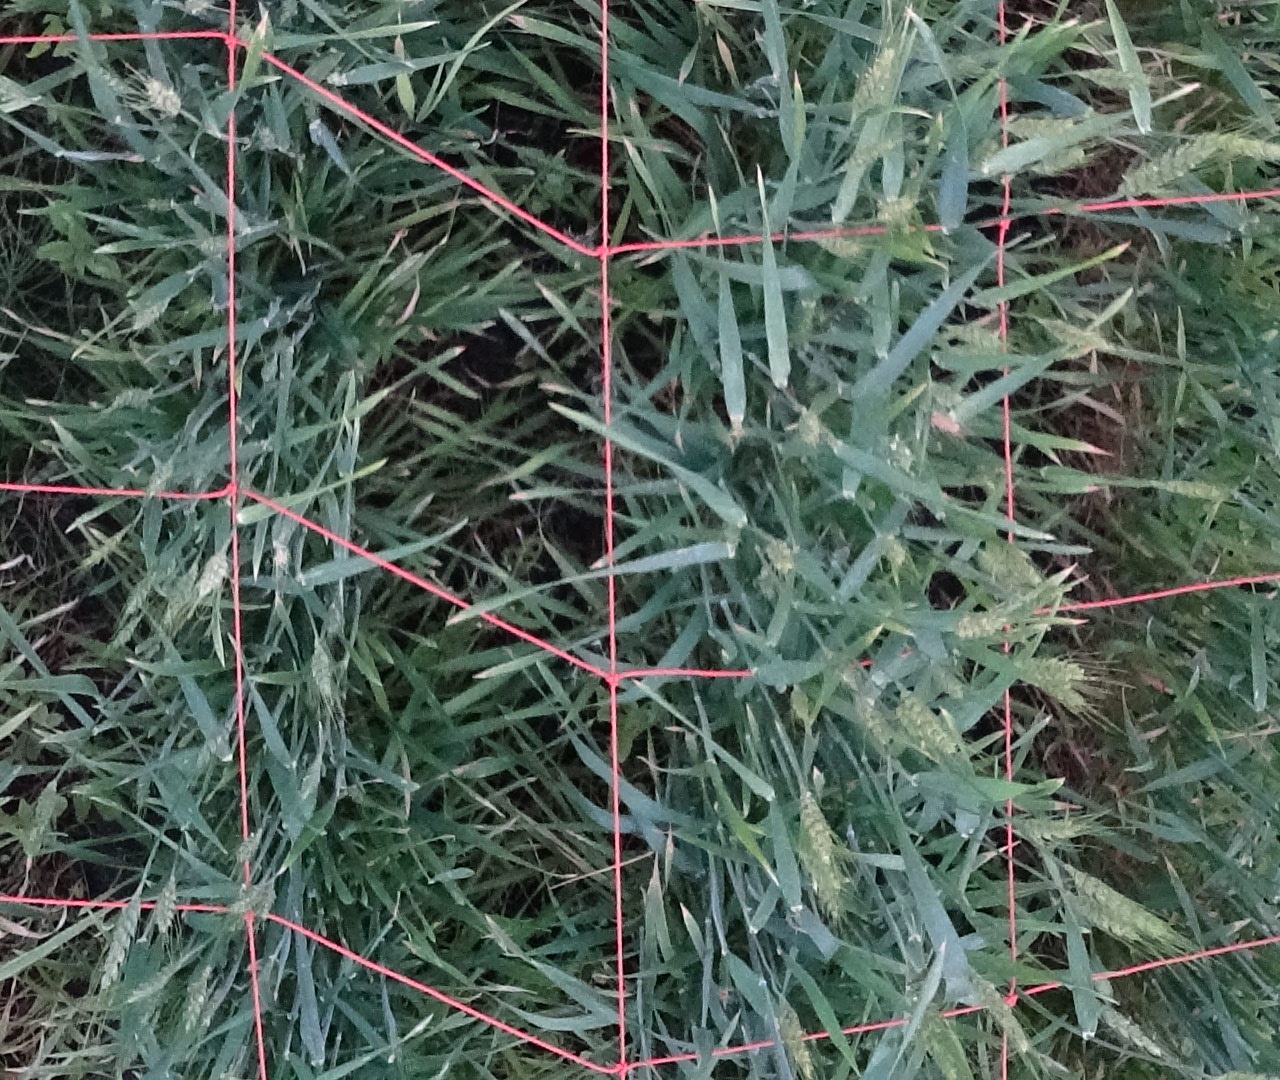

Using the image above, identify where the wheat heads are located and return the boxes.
[233,831,261,860]
[920,1026,961,1078]
[136,773,148,811]
[102,898,140,984]
[898,689,954,758]
[1062,891,1144,952]
[994,542,1041,585]
[143,458,178,491]
[108,621,136,655]
[839,136,901,169]
[853,50,896,102]
[805,844,840,922]
[943,321,1003,356]
[202,223,228,254]
[1047,686,1092,715]
[1015,655,1097,691]
[1083,63,1156,92]
[925,381,957,404]
[1196,130,1280,169]
[857,689,891,742]
[1157,476,1223,502]
[201,547,235,594]
[798,789,832,856]
[778,1007,813,1073]
[314,644,337,704]
[126,573,151,624]
[139,301,168,330]
[116,952,178,1016]
[91,531,131,562]
[159,879,183,927]
[1119,143,1212,195]
[159,564,197,623]
[183,965,211,1034]
[1030,146,1089,176]
[233,881,266,924]
[260,124,275,153]
[142,76,171,115]
[198,723,238,761]
[1021,815,1092,840]
[971,974,1026,1048]
[881,197,913,219]
[884,428,918,470]
[1092,995,1158,1059]
[1044,314,1103,349]
[958,611,1017,637]
[816,228,857,257]
[796,410,819,439]
[85,47,134,99]
[108,390,146,410]
[1014,115,1073,135]
[1071,865,1169,935]
[764,540,800,569]
[885,538,907,573]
